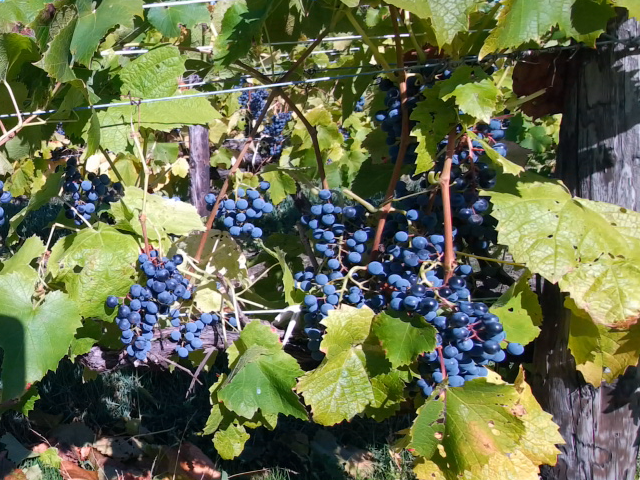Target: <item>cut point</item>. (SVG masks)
<instances>
[{"label":"cut point","instance_id":"obj_1","mask_svg":"<svg viewBox=\"0 0 640 480\" xmlns=\"http://www.w3.org/2000/svg\"><path fill=\"white\" fill-rule=\"evenodd\" d=\"M143 218L145 219V221L147 223H149L154 228V231L157 234L159 245H162V239H161L160 231L158 230L156 224L152 220L148 219V217L146 215H143Z\"/></svg>","mask_w":640,"mask_h":480}]
</instances>
